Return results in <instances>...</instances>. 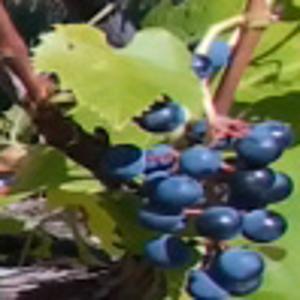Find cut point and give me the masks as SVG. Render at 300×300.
<instances>
[{
	"label": "cut point",
	"mask_w": 300,
	"mask_h": 300,
	"mask_svg": "<svg viewBox=\"0 0 300 300\" xmlns=\"http://www.w3.org/2000/svg\"><path fill=\"white\" fill-rule=\"evenodd\" d=\"M246 22V16L239 14L236 16L223 17L216 25L212 26L196 47V53L203 55L208 51L209 45L213 42L218 34H221L228 26L241 25Z\"/></svg>",
	"instance_id": "6a23745f"
},
{
	"label": "cut point",
	"mask_w": 300,
	"mask_h": 300,
	"mask_svg": "<svg viewBox=\"0 0 300 300\" xmlns=\"http://www.w3.org/2000/svg\"><path fill=\"white\" fill-rule=\"evenodd\" d=\"M208 81L206 79H201L198 85V96L199 100L204 107V111L208 117H215L217 115V110L213 106L212 100L208 95Z\"/></svg>",
	"instance_id": "7d7e1d6f"
}]
</instances>
